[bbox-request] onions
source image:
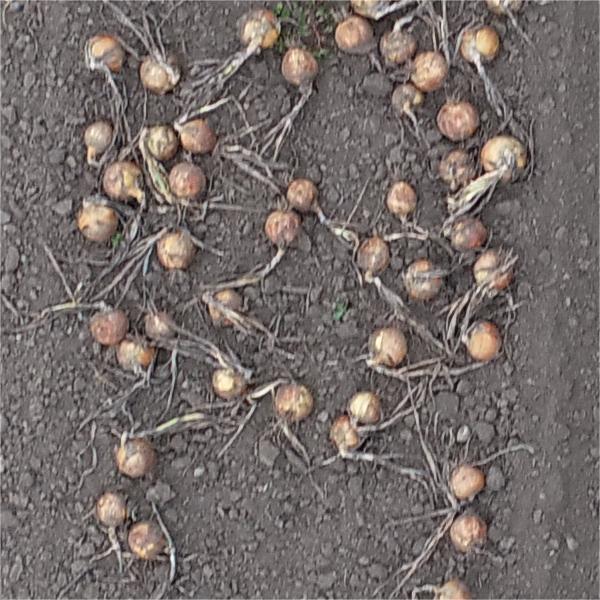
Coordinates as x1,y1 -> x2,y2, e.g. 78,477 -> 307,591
115,437 -> 156,477
381,27 -> 417,65
142,309 -> 170,337
155,227 -> 196,268
76,199 -> 116,240
484,0 -> 523,13
449,215 -> 485,250
95,491 -> 128,525
90,307 -> 126,344
368,324 -> 406,365
385,182 -> 416,216
127,521 -> 164,557
460,25 -> 501,60
352,0 -> 383,22
208,289 -> 242,327
436,148 -> 473,184
463,321 -> 500,359
335,15 -> 373,53
281,47 -> 319,83
352,236 -> 388,276
81,119 -> 114,155
449,464 -> 484,497
165,161 -> 204,199
347,389 -> 380,421
115,336 -> 150,369
264,211 -> 302,246
478,135 -> 526,180
177,116 -> 214,153
101,158 -> 142,200
138,56 -> 174,92
285,178 -> 316,211
236,8 -> 279,50
143,125 -> 178,159
436,575 -> 469,599
436,100 -> 476,139
409,49 -> 448,90
330,415 -> 361,448
448,513 -> 485,550
210,366 -> 245,396
392,84 -> 422,113
85,32 -> 123,68
403,257 -> 442,298
473,248 -> 513,287
272,381 -> 311,419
